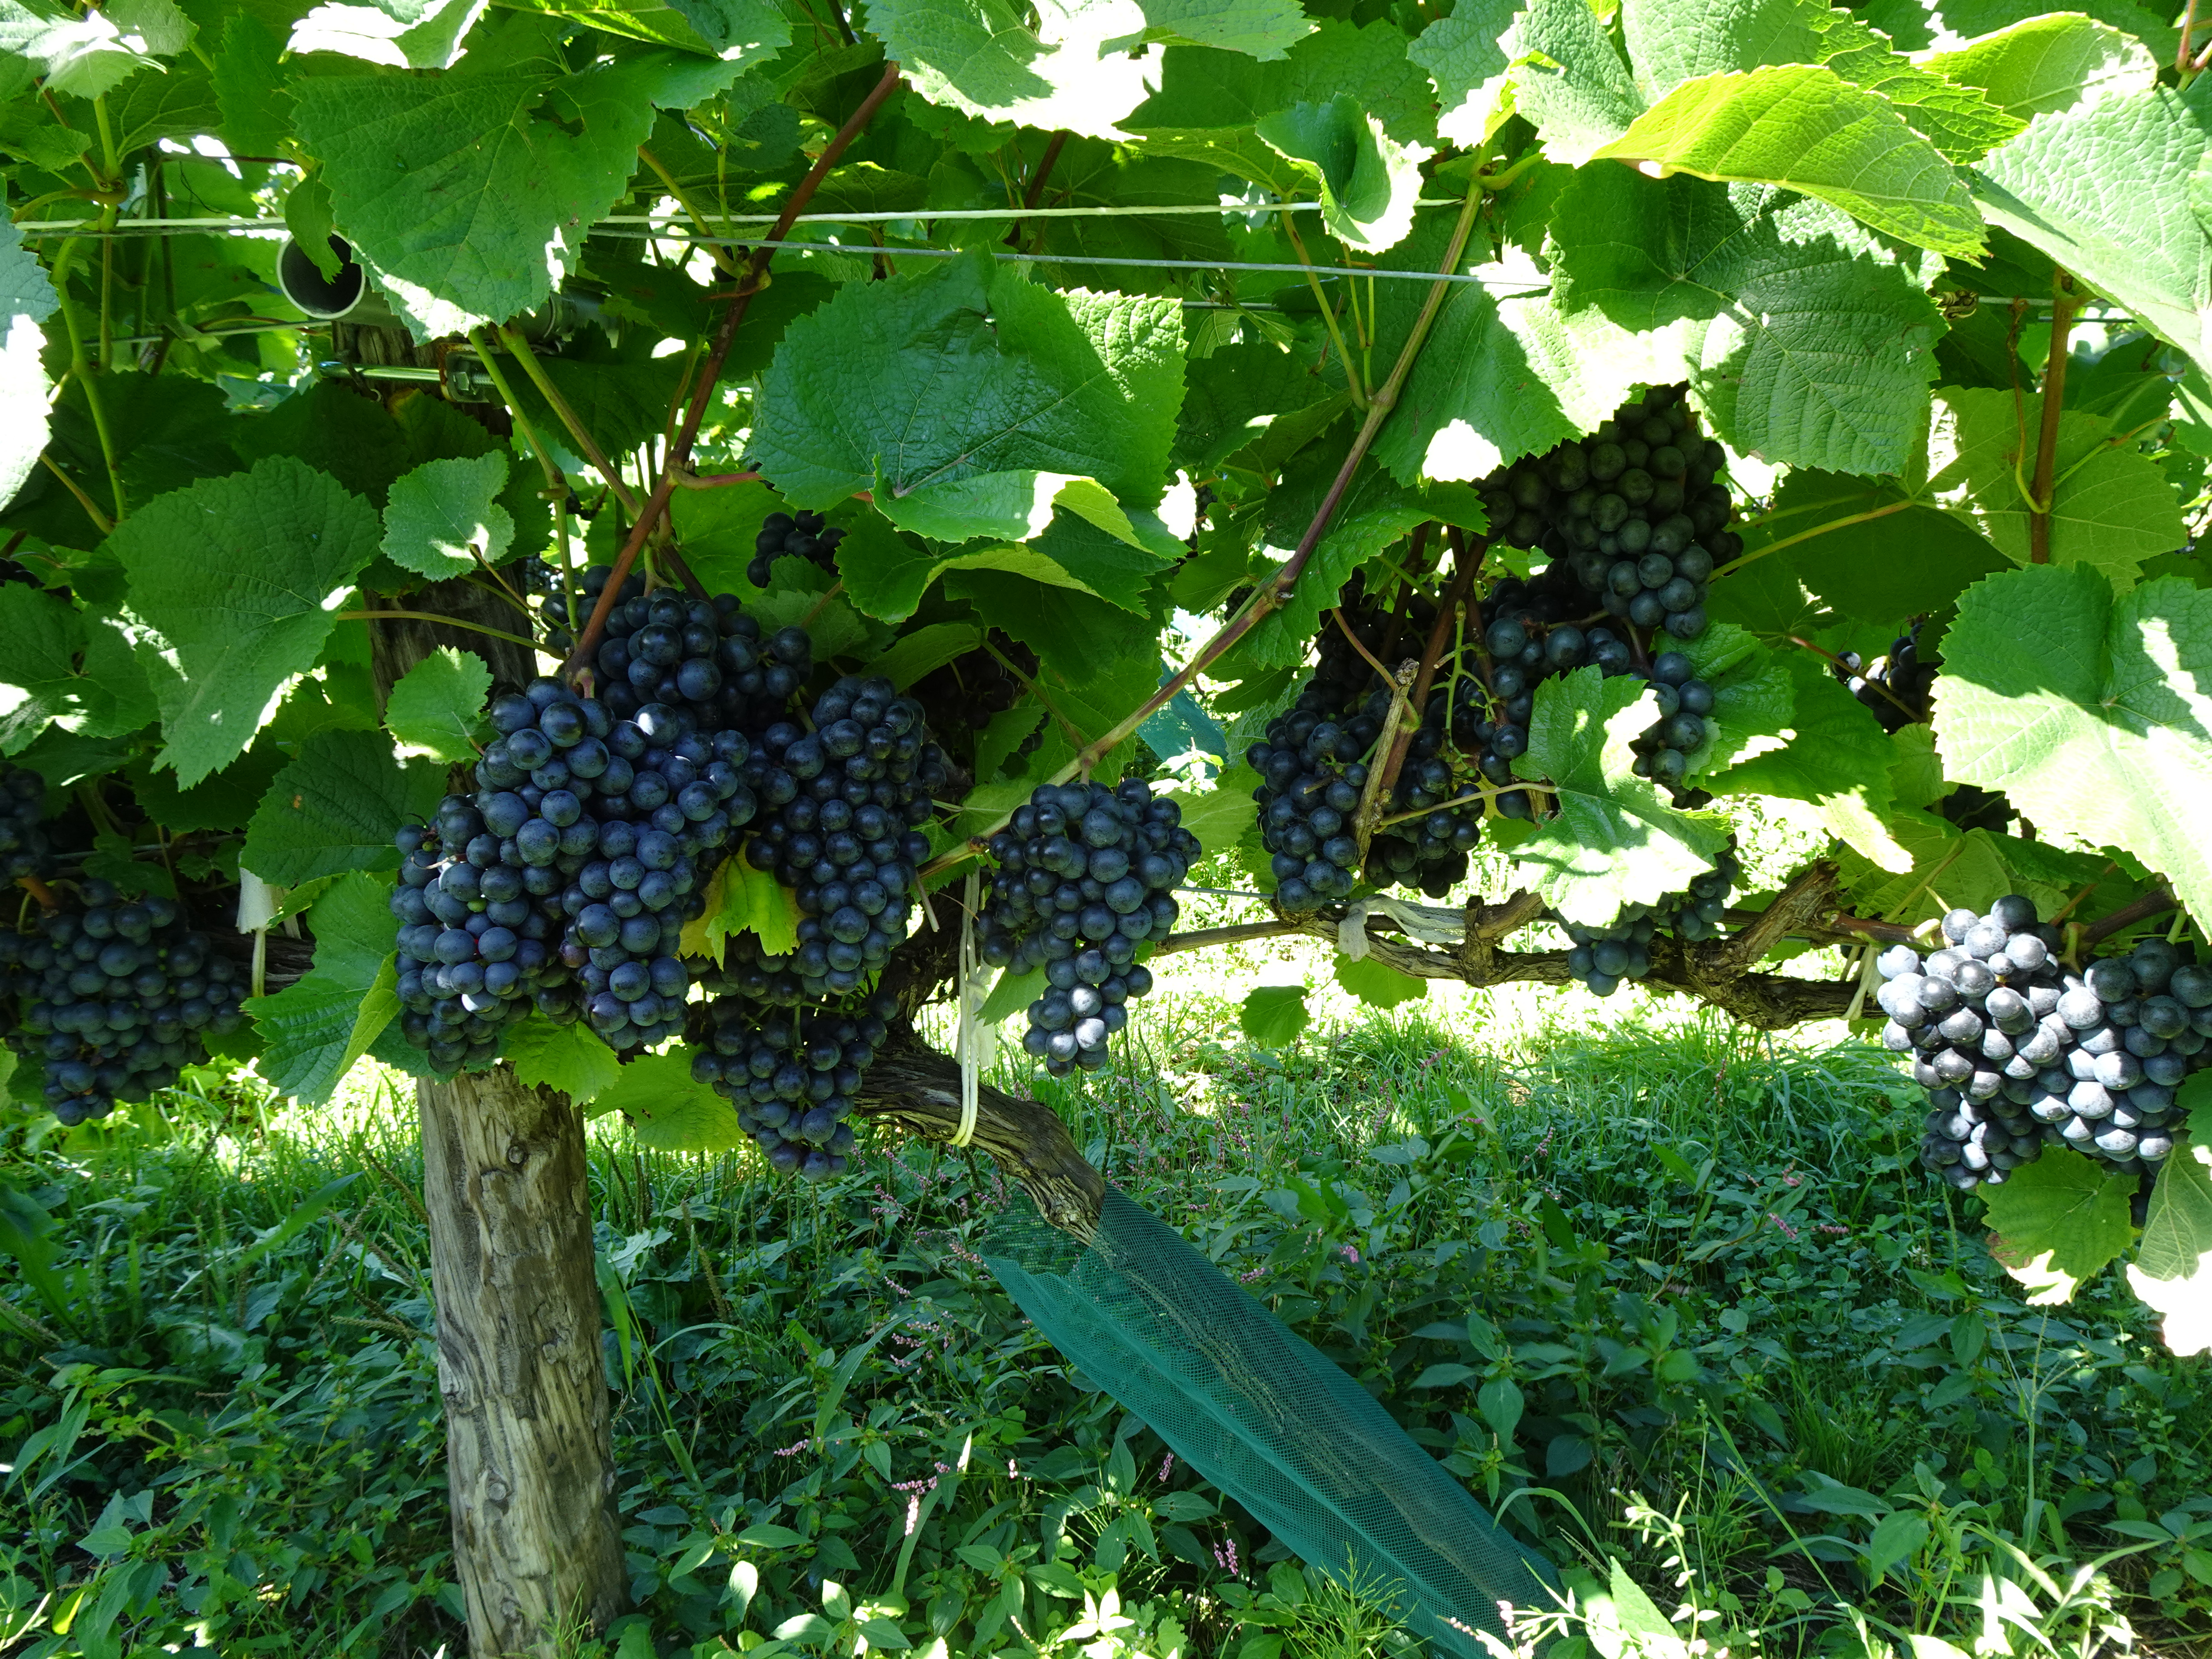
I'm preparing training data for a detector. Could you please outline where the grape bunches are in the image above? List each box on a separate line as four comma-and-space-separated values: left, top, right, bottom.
466, 674, 614, 903
1461, 606, 1714, 825
1305, 567, 1436, 721
556, 702, 756, 1052
540, 566, 812, 741
393, 791, 560, 1075
747, 508, 848, 589
1874, 894, 2073, 1192
691, 929, 900, 1184
7, 855, 247, 1126
0, 764, 49, 1039
2054, 936, 2212, 1177
1469, 385, 1744, 638
973, 777, 1201, 1080
1247, 666, 1485, 915
910, 627, 1051, 785
1569, 920, 1654, 996
744, 675, 948, 996
1670, 832, 1740, 943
